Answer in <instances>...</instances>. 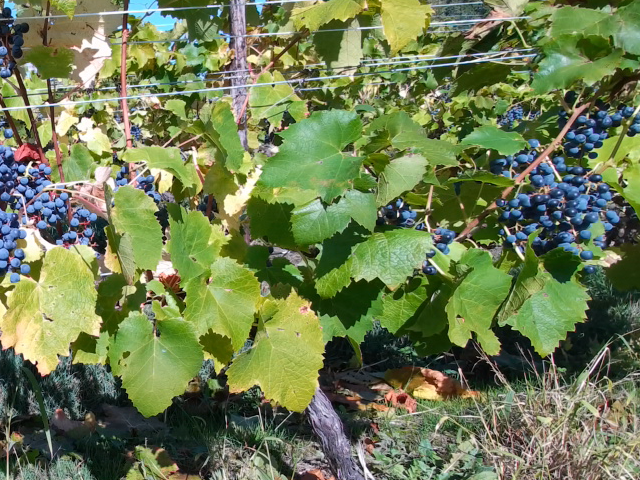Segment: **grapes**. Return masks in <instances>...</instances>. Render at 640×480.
<instances>
[{
	"label": "grapes",
	"mask_w": 640,
	"mask_h": 480,
	"mask_svg": "<svg viewBox=\"0 0 640 480\" xmlns=\"http://www.w3.org/2000/svg\"><path fill=\"white\" fill-rule=\"evenodd\" d=\"M566 158L554 156L552 163L555 171L566 172L561 179L562 183L555 182L553 168L546 162L536 166L530 174L529 181L534 187L549 186V195H536V191L517 193L516 198L507 201L499 198L496 200L498 207H503L501 217L504 220L524 221L533 219V223L525 225L517 233H509L505 237L507 244L527 241L529 235L541 226L544 228L539 237H534L531 247L537 257L548 253L556 247H563L568 253L578 255L580 248L570 246L577 240L571 232L574 226L578 237L589 240L592 237L593 223L599 221V211L608 205L613 199V193L609 191L607 183H599L597 190L587 193L584 184L590 183L591 187L603 180L599 173L585 175L592 172V168L566 166Z\"/></svg>",
	"instance_id": "01657485"
},
{
	"label": "grapes",
	"mask_w": 640,
	"mask_h": 480,
	"mask_svg": "<svg viewBox=\"0 0 640 480\" xmlns=\"http://www.w3.org/2000/svg\"><path fill=\"white\" fill-rule=\"evenodd\" d=\"M423 269H422V273L425 275H436L437 274V269L434 267H430V264L428 261H424L423 262Z\"/></svg>",
	"instance_id": "9fbda902"
},
{
	"label": "grapes",
	"mask_w": 640,
	"mask_h": 480,
	"mask_svg": "<svg viewBox=\"0 0 640 480\" xmlns=\"http://www.w3.org/2000/svg\"><path fill=\"white\" fill-rule=\"evenodd\" d=\"M29 31V24L22 22L16 24L12 22H0V38H6L9 45H13L11 53L15 59H19L23 55L21 46L24 44L23 34Z\"/></svg>",
	"instance_id": "83cd7487"
},
{
	"label": "grapes",
	"mask_w": 640,
	"mask_h": 480,
	"mask_svg": "<svg viewBox=\"0 0 640 480\" xmlns=\"http://www.w3.org/2000/svg\"><path fill=\"white\" fill-rule=\"evenodd\" d=\"M595 107L598 111L592 114L589 119L585 114L579 115L565 135L569 142H565L563 147L568 158H581L585 152H590L588 157L596 159L598 154L591 151L601 148L603 141L609 138V134L604 129L610 126L618 128L623 123V118L629 119L635 111L633 106L620 103L617 106L618 111L608 115L607 110L610 104L608 102L602 103L600 99L595 101Z\"/></svg>",
	"instance_id": "b958b902"
},
{
	"label": "grapes",
	"mask_w": 640,
	"mask_h": 480,
	"mask_svg": "<svg viewBox=\"0 0 640 480\" xmlns=\"http://www.w3.org/2000/svg\"><path fill=\"white\" fill-rule=\"evenodd\" d=\"M82 218L87 224L95 225L97 223V214L91 213L87 207H77L74 211L73 218L70 220L71 227H78Z\"/></svg>",
	"instance_id": "ef6de9ee"
},
{
	"label": "grapes",
	"mask_w": 640,
	"mask_h": 480,
	"mask_svg": "<svg viewBox=\"0 0 640 480\" xmlns=\"http://www.w3.org/2000/svg\"><path fill=\"white\" fill-rule=\"evenodd\" d=\"M528 143L530 144V149L532 151L527 153H520L516 157L515 156H506L505 159L498 158L492 160L490 162V173L494 175H501L505 178H510L511 173L505 167L511 166L512 168H517L518 164H527L531 163L533 159L537 156V147L540 145V140L538 138H529Z\"/></svg>",
	"instance_id": "5460f4e3"
},
{
	"label": "grapes",
	"mask_w": 640,
	"mask_h": 480,
	"mask_svg": "<svg viewBox=\"0 0 640 480\" xmlns=\"http://www.w3.org/2000/svg\"><path fill=\"white\" fill-rule=\"evenodd\" d=\"M558 116L559 118L557 119V123L558 127L561 129L567 121V119L565 118L567 116V111L565 109L560 110L558 112Z\"/></svg>",
	"instance_id": "34c12dc5"
},
{
	"label": "grapes",
	"mask_w": 640,
	"mask_h": 480,
	"mask_svg": "<svg viewBox=\"0 0 640 480\" xmlns=\"http://www.w3.org/2000/svg\"><path fill=\"white\" fill-rule=\"evenodd\" d=\"M28 233L20 229L18 214L6 213L0 208V269L11 273L13 269H19L22 274H28L31 267L27 263L22 264L26 252L18 248L17 239H24Z\"/></svg>",
	"instance_id": "84f90ec7"
},
{
	"label": "grapes",
	"mask_w": 640,
	"mask_h": 480,
	"mask_svg": "<svg viewBox=\"0 0 640 480\" xmlns=\"http://www.w3.org/2000/svg\"><path fill=\"white\" fill-rule=\"evenodd\" d=\"M155 181V176L152 174H148L147 176H139L136 178L137 189H144V192L153 198L155 203H159L161 200V194L158 191H155V187L152 184Z\"/></svg>",
	"instance_id": "2adb6a1f"
},
{
	"label": "grapes",
	"mask_w": 640,
	"mask_h": 480,
	"mask_svg": "<svg viewBox=\"0 0 640 480\" xmlns=\"http://www.w3.org/2000/svg\"><path fill=\"white\" fill-rule=\"evenodd\" d=\"M434 234L442 235L441 241L435 242L436 249L439 250L443 255H449L450 248L448 245H450L456 238V231L449 228L443 229L442 227H437L434 231Z\"/></svg>",
	"instance_id": "e5b3c951"
},
{
	"label": "grapes",
	"mask_w": 640,
	"mask_h": 480,
	"mask_svg": "<svg viewBox=\"0 0 640 480\" xmlns=\"http://www.w3.org/2000/svg\"><path fill=\"white\" fill-rule=\"evenodd\" d=\"M605 219V221H600V223L604 225L606 232H610L621 222V217L614 210H607L605 212Z\"/></svg>",
	"instance_id": "54f908b8"
},
{
	"label": "grapes",
	"mask_w": 640,
	"mask_h": 480,
	"mask_svg": "<svg viewBox=\"0 0 640 480\" xmlns=\"http://www.w3.org/2000/svg\"><path fill=\"white\" fill-rule=\"evenodd\" d=\"M416 217L417 212L411 210V206L409 204H405L399 209L398 219L394 220L393 224L412 228L414 226V219Z\"/></svg>",
	"instance_id": "1ff8f66d"
},
{
	"label": "grapes",
	"mask_w": 640,
	"mask_h": 480,
	"mask_svg": "<svg viewBox=\"0 0 640 480\" xmlns=\"http://www.w3.org/2000/svg\"><path fill=\"white\" fill-rule=\"evenodd\" d=\"M127 175H129L128 167H122L121 170L117 171V173L115 174V181H114V187H113L114 192H117L121 186H124L129 183L128 178L124 179V176H127Z\"/></svg>",
	"instance_id": "dcf779d0"
},
{
	"label": "grapes",
	"mask_w": 640,
	"mask_h": 480,
	"mask_svg": "<svg viewBox=\"0 0 640 480\" xmlns=\"http://www.w3.org/2000/svg\"><path fill=\"white\" fill-rule=\"evenodd\" d=\"M77 238V232L76 231H69L66 233H63L61 235V238H57L55 240V244L56 245H63L64 242H68L69 240H74Z\"/></svg>",
	"instance_id": "802abce8"
},
{
	"label": "grapes",
	"mask_w": 640,
	"mask_h": 480,
	"mask_svg": "<svg viewBox=\"0 0 640 480\" xmlns=\"http://www.w3.org/2000/svg\"><path fill=\"white\" fill-rule=\"evenodd\" d=\"M93 236V230L90 228H86L83 230V236H81L79 238V244L80 245H88L89 244V239Z\"/></svg>",
	"instance_id": "012428b0"
},
{
	"label": "grapes",
	"mask_w": 640,
	"mask_h": 480,
	"mask_svg": "<svg viewBox=\"0 0 640 480\" xmlns=\"http://www.w3.org/2000/svg\"><path fill=\"white\" fill-rule=\"evenodd\" d=\"M67 199H70L68 192H61L59 197H56L53 201H50V195L48 193L41 192L38 197L26 207V212L28 214H34L36 211H41V215L48 219L50 224H55L67 215Z\"/></svg>",
	"instance_id": "f8a65327"
},
{
	"label": "grapes",
	"mask_w": 640,
	"mask_h": 480,
	"mask_svg": "<svg viewBox=\"0 0 640 480\" xmlns=\"http://www.w3.org/2000/svg\"><path fill=\"white\" fill-rule=\"evenodd\" d=\"M403 199L402 198H398L396 200H393L392 202H390L388 205H386L385 207L381 208L382 212L384 213V216L387 219H396L397 218V210L396 208H399L402 205Z\"/></svg>",
	"instance_id": "91a60905"
},
{
	"label": "grapes",
	"mask_w": 640,
	"mask_h": 480,
	"mask_svg": "<svg viewBox=\"0 0 640 480\" xmlns=\"http://www.w3.org/2000/svg\"><path fill=\"white\" fill-rule=\"evenodd\" d=\"M13 152L9 146L0 145V201L8 202L12 210H19L23 207V202L31 201L37 193L46 186L51 185V181L45 179L44 175H50L52 168L45 164H39L36 169L31 168L29 175L35 179L21 178L17 184L19 174L25 172L24 163H16L13 159ZM12 189L16 194H24L23 202L19 196H12Z\"/></svg>",
	"instance_id": "0513c4c2"
}]
</instances>
